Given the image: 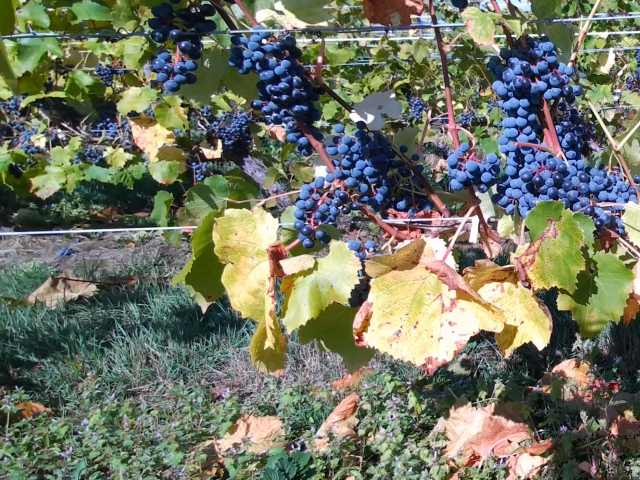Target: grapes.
<instances>
[{"mask_svg":"<svg viewBox=\"0 0 640 480\" xmlns=\"http://www.w3.org/2000/svg\"><path fill=\"white\" fill-rule=\"evenodd\" d=\"M365 248L366 249H370V250H374L375 251V253H374L375 257H378V258L382 257V253L379 252L380 248L376 246V243L374 241H367L365 243Z\"/></svg>","mask_w":640,"mask_h":480,"instance_id":"83cd7487","label":"grapes"},{"mask_svg":"<svg viewBox=\"0 0 640 480\" xmlns=\"http://www.w3.org/2000/svg\"><path fill=\"white\" fill-rule=\"evenodd\" d=\"M151 13L158 17L150 18L148 26L152 29L150 38L154 43H167L170 38L178 43V51L186 54L191 60H180L173 66L168 65L171 61V54L168 51H160L151 61V67L159 72L155 76V80L164 84V88L169 93L178 92L182 86L194 85L198 81V77L189 71H196L198 65L193 60L201 57L203 50V35L209 31H215L217 24L214 20H205L217 13L215 7L210 3H203L199 12H191L189 9L180 8L176 11V15L183 20V26L186 29H193L197 33L182 34L179 27L173 24V7L162 2L151 8Z\"/></svg>","mask_w":640,"mask_h":480,"instance_id":"84f90ec7","label":"grapes"},{"mask_svg":"<svg viewBox=\"0 0 640 480\" xmlns=\"http://www.w3.org/2000/svg\"><path fill=\"white\" fill-rule=\"evenodd\" d=\"M514 49L502 50L499 56H492L486 62V68L494 74L492 91L502 98L499 107L508 117L501 120L504 134L498 138L499 152L507 155L506 176L496 184V193L491 197L493 204L504 207L507 215L515 214L513 199L519 201V217L526 219L536 207V202L561 199L572 212L582 209L585 215L595 217L594 236L604 234L603 226L615 223L619 235H623L624 222L618 216L604 213L600 206L589 205L586 194H594L597 202L609 201L627 204L632 201L639 204L636 191H640V175H634L636 185L631 187L623 182L620 173L609 172L606 164L597 169L585 167L579 149L583 141L584 129L579 123L578 111H568L569 120L555 125L559 145L571 166H567L560 157L550 152L539 151L537 147H521L516 143H534L541 147L537 135L542 129L537 122L536 111L543 99L552 100L563 97L568 105L581 98L584 89L579 85H569L574 73L572 66L559 62L556 46L548 36L538 41L528 37L526 44L516 40Z\"/></svg>","mask_w":640,"mask_h":480,"instance_id":"01657485","label":"grapes"},{"mask_svg":"<svg viewBox=\"0 0 640 480\" xmlns=\"http://www.w3.org/2000/svg\"><path fill=\"white\" fill-rule=\"evenodd\" d=\"M347 246L351 251H355V257L359 259L362 263H365L370 259L369 255H366L365 251H360L361 243L355 239H349L347 241Z\"/></svg>","mask_w":640,"mask_h":480,"instance_id":"5460f4e3","label":"grapes"},{"mask_svg":"<svg viewBox=\"0 0 640 480\" xmlns=\"http://www.w3.org/2000/svg\"><path fill=\"white\" fill-rule=\"evenodd\" d=\"M470 150L471 145L462 142L460 147L447 157V171L452 178L447 182L448 189L452 192H459L474 184L480 194H486L489 187L496 183L494 175L500 173V160L495 153H489L486 156V161L480 163L459 161V158H463L465 153Z\"/></svg>","mask_w":640,"mask_h":480,"instance_id":"f8a65327","label":"grapes"},{"mask_svg":"<svg viewBox=\"0 0 640 480\" xmlns=\"http://www.w3.org/2000/svg\"><path fill=\"white\" fill-rule=\"evenodd\" d=\"M356 127L359 130L354 134L355 141L350 135L343 134L345 127L342 124H336L333 127V131L339 135L333 138V144L326 147V153L329 156L344 154L340 160L337 158L332 160L336 168H342L336 169L332 173L328 167H325L324 177L318 176L315 181L302 185L299 192L300 199L294 202V207L297 210L293 211L295 219L293 226L298 231L297 240L302 242V247L306 250H313L315 241L311 238L312 226L306 225L311 214L305 213V209L314 211V224L320 221L326 225L327 221H337V217L340 215V210L337 207L348 203V194L341 189H335L334 198L328 200L327 204L317 207L321 194L314 192L312 187L322 189L325 186V181L333 183L336 179H341L348 188L358 187L357 192L360 194L358 201L361 204L368 203L375 212L381 210L380 216L383 219L389 216L388 209L392 207L406 213L409 217L416 215V211L410 207L413 202L410 196L396 197L391 195L386 197L390 193V188L396 185V180L393 177H387V173L391 169H397L399 176L409 178L412 171L408 168V164L405 161L393 160L396 153L391 150L385 137L375 134L374 140H372L366 136L363 131L366 124L362 120L356 122Z\"/></svg>","mask_w":640,"mask_h":480,"instance_id":"b958b902","label":"grapes"},{"mask_svg":"<svg viewBox=\"0 0 640 480\" xmlns=\"http://www.w3.org/2000/svg\"><path fill=\"white\" fill-rule=\"evenodd\" d=\"M271 33L252 34L250 37L231 36L230 42L237 46L231 52L228 65L238 67L240 76H248L251 71L259 72L256 88L258 99L250 106L255 111L269 115L275 125L285 124V140L295 146L298 155L311 156L313 146L309 143L296 123H303L319 141L324 134L313 124L321 119L320 112L313 105L325 91L312 87L305 77L306 67L297 60L301 50L295 45L296 38L285 34L283 38L262 44Z\"/></svg>","mask_w":640,"mask_h":480,"instance_id":"0513c4c2","label":"grapes"}]
</instances>
